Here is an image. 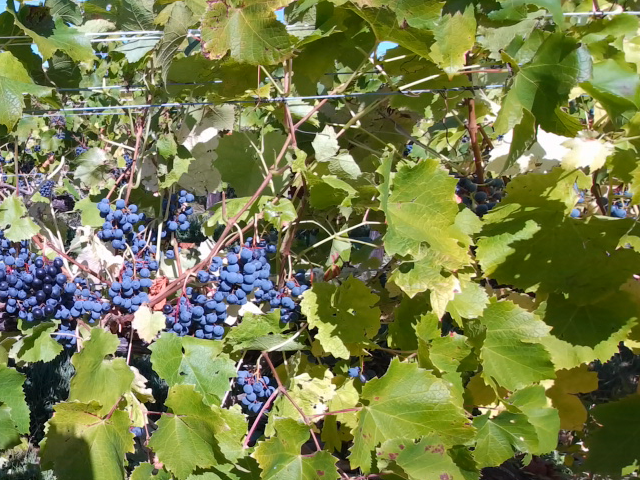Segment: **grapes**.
<instances>
[{
    "label": "grapes",
    "instance_id": "1",
    "mask_svg": "<svg viewBox=\"0 0 640 480\" xmlns=\"http://www.w3.org/2000/svg\"><path fill=\"white\" fill-rule=\"evenodd\" d=\"M20 252L17 258V249L11 247V241L4 238L0 231V303L5 304L7 313H15L26 322L40 321L42 318L53 317L63 319L60 322L56 341L66 340L68 343L64 347L71 349L76 345L78 336L71 328L70 318H79L81 315L91 313L88 316V323H95L101 315H107L112 309V304L128 309L129 313L137 312L142 303H150V295L144 292V288H152L153 281L150 279L151 272L160 269V262L152 259L155 253V246L151 245L143 251V258L134 259L135 268L138 271V278L133 276L134 263L125 260L124 270L121 274V282H113L107 289V294L112 298L110 301L100 302L102 293L94 291L91 295L92 283H88L87 278L75 277L67 282V276L62 273L64 260L61 257H53L51 264L45 265L42 257H37L36 253H30L26 248L28 240H20ZM27 263L28 271L11 269L9 272L6 266L13 265L16 268H24Z\"/></svg>",
    "mask_w": 640,
    "mask_h": 480
},
{
    "label": "grapes",
    "instance_id": "2",
    "mask_svg": "<svg viewBox=\"0 0 640 480\" xmlns=\"http://www.w3.org/2000/svg\"><path fill=\"white\" fill-rule=\"evenodd\" d=\"M253 238L248 236L242 246L236 245L227 253L226 264L219 256H213L209 270H201L197 275V281L206 284L210 281L217 282V291L212 299L206 294L194 292L192 286L185 288L178 306V316L172 315L175 306L164 305L163 315L166 322L172 328H165L167 333H175L178 337L186 336L189 327L195 323L194 336L199 340L221 341L224 338L225 328L220 324L228 316L227 305L244 306L248 303V298L253 289L258 287L254 293L255 303L260 305L263 301L268 302L269 312L280 308V322L282 324L294 323L301 315L300 306L294 303L296 299L311 287V282L305 279V271L299 269L296 272V279L299 287L293 281H287L285 287L292 291L291 297L285 296L286 291H277L275 283L270 280L272 277L273 265L269 263L268 254H276L278 246L268 245L266 240H261L256 247H252Z\"/></svg>",
    "mask_w": 640,
    "mask_h": 480
},
{
    "label": "grapes",
    "instance_id": "3",
    "mask_svg": "<svg viewBox=\"0 0 640 480\" xmlns=\"http://www.w3.org/2000/svg\"><path fill=\"white\" fill-rule=\"evenodd\" d=\"M97 209L100 211L99 216L105 219L98 231L99 239L112 241V247L116 250H126V243L132 242L131 250L134 254H138L147 245V241L137 238V233L133 231V225L147 219L145 213H139L140 206L137 203H130L126 207L124 199H117L113 210L109 199L101 198Z\"/></svg>",
    "mask_w": 640,
    "mask_h": 480
},
{
    "label": "grapes",
    "instance_id": "4",
    "mask_svg": "<svg viewBox=\"0 0 640 480\" xmlns=\"http://www.w3.org/2000/svg\"><path fill=\"white\" fill-rule=\"evenodd\" d=\"M253 373L247 370H239L236 377V384L242 388V392L246 395L241 399V403L247 406L248 411L259 413L264 406V402H257L258 397H270L275 392V386L271 385V379L268 376H261L260 380L254 377L251 385L245 378H251Z\"/></svg>",
    "mask_w": 640,
    "mask_h": 480
},
{
    "label": "grapes",
    "instance_id": "5",
    "mask_svg": "<svg viewBox=\"0 0 640 480\" xmlns=\"http://www.w3.org/2000/svg\"><path fill=\"white\" fill-rule=\"evenodd\" d=\"M194 214V208L192 206H186L184 211H181L178 215H172L166 220V226L162 229V238H166L168 231L174 232L178 229L180 231L188 232L191 228V222L187 220V216Z\"/></svg>",
    "mask_w": 640,
    "mask_h": 480
},
{
    "label": "grapes",
    "instance_id": "6",
    "mask_svg": "<svg viewBox=\"0 0 640 480\" xmlns=\"http://www.w3.org/2000/svg\"><path fill=\"white\" fill-rule=\"evenodd\" d=\"M622 207L623 204L621 202H617L616 205L612 204L610 217L625 219L628 216V211L626 209H623Z\"/></svg>",
    "mask_w": 640,
    "mask_h": 480
},
{
    "label": "grapes",
    "instance_id": "7",
    "mask_svg": "<svg viewBox=\"0 0 640 480\" xmlns=\"http://www.w3.org/2000/svg\"><path fill=\"white\" fill-rule=\"evenodd\" d=\"M178 202H177V207L181 208L183 204L185 203H194L195 202V196L192 193H187L186 189H180L178 191Z\"/></svg>",
    "mask_w": 640,
    "mask_h": 480
},
{
    "label": "grapes",
    "instance_id": "8",
    "mask_svg": "<svg viewBox=\"0 0 640 480\" xmlns=\"http://www.w3.org/2000/svg\"><path fill=\"white\" fill-rule=\"evenodd\" d=\"M361 371V367L360 366H355V367H350L347 371V376L349 378H357L359 377V381L361 383H365L369 380V376L367 375L366 372H363L362 375L360 373Z\"/></svg>",
    "mask_w": 640,
    "mask_h": 480
}]
</instances>
